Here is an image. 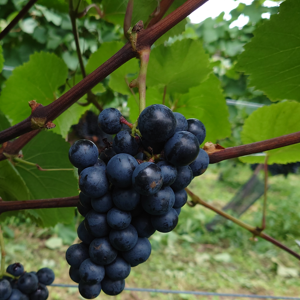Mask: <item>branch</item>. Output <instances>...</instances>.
<instances>
[{
  "mask_svg": "<svg viewBox=\"0 0 300 300\" xmlns=\"http://www.w3.org/2000/svg\"><path fill=\"white\" fill-rule=\"evenodd\" d=\"M207 1L209 0H186L181 6L161 20L173 3V0H161L159 6L152 13L151 21L144 28L142 19H139L131 27L133 1L129 0L124 15V36L129 42L111 58L99 65L92 73L50 104L43 106L36 100H31L28 103V106L31 108V115L14 126L0 131V145L2 146L0 147V161L14 157L43 128H55L56 125L53 121L57 117L77 103L87 92L104 78L113 74L127 61L134 57L140 59L138 56L139 50L147 45L152 46L160 37Z\"/></svg>",
  "mask_w": 300,
  "mask_h": 300,
  "instance_id": "obj_1",
  "label": "branch"
},
{
  "mask_svg": "<svg viewBox=\"0 0 300 300\" xmlns=\"http://www.w3.org/2000/svg\"><path fill=\"white\" fill-rule=\"evenodd\" d=\"M300 142V131L274 137L273 139L254 142L242 146L222 147L220 144L205 142L203 149L210 157V164L244 155L262 153L263 151L281 148Z\"/></svg>",
  "mask_w": 300,
  "mask_h": 300,
  "instance_id": "obj_2",
  "label": "branch"
},
{
  "mask_svg": "<svg viewBox=\"0 0 300 300\" xmlns=\"http://www.w3.org/2000/svg\"><path fill=\"white\" fill-rule=\"evenodd\" d=\"M78 201L79 195L66 198L31 199L17 201H4L2 197H0V215L8 211H18L23 209L77 207Z\"/></svg>",
  "mask_w": 300,
  "mask_h": 300,
  "instance_id": "obj_3",
  "label": "branch"
}]
</instances>
